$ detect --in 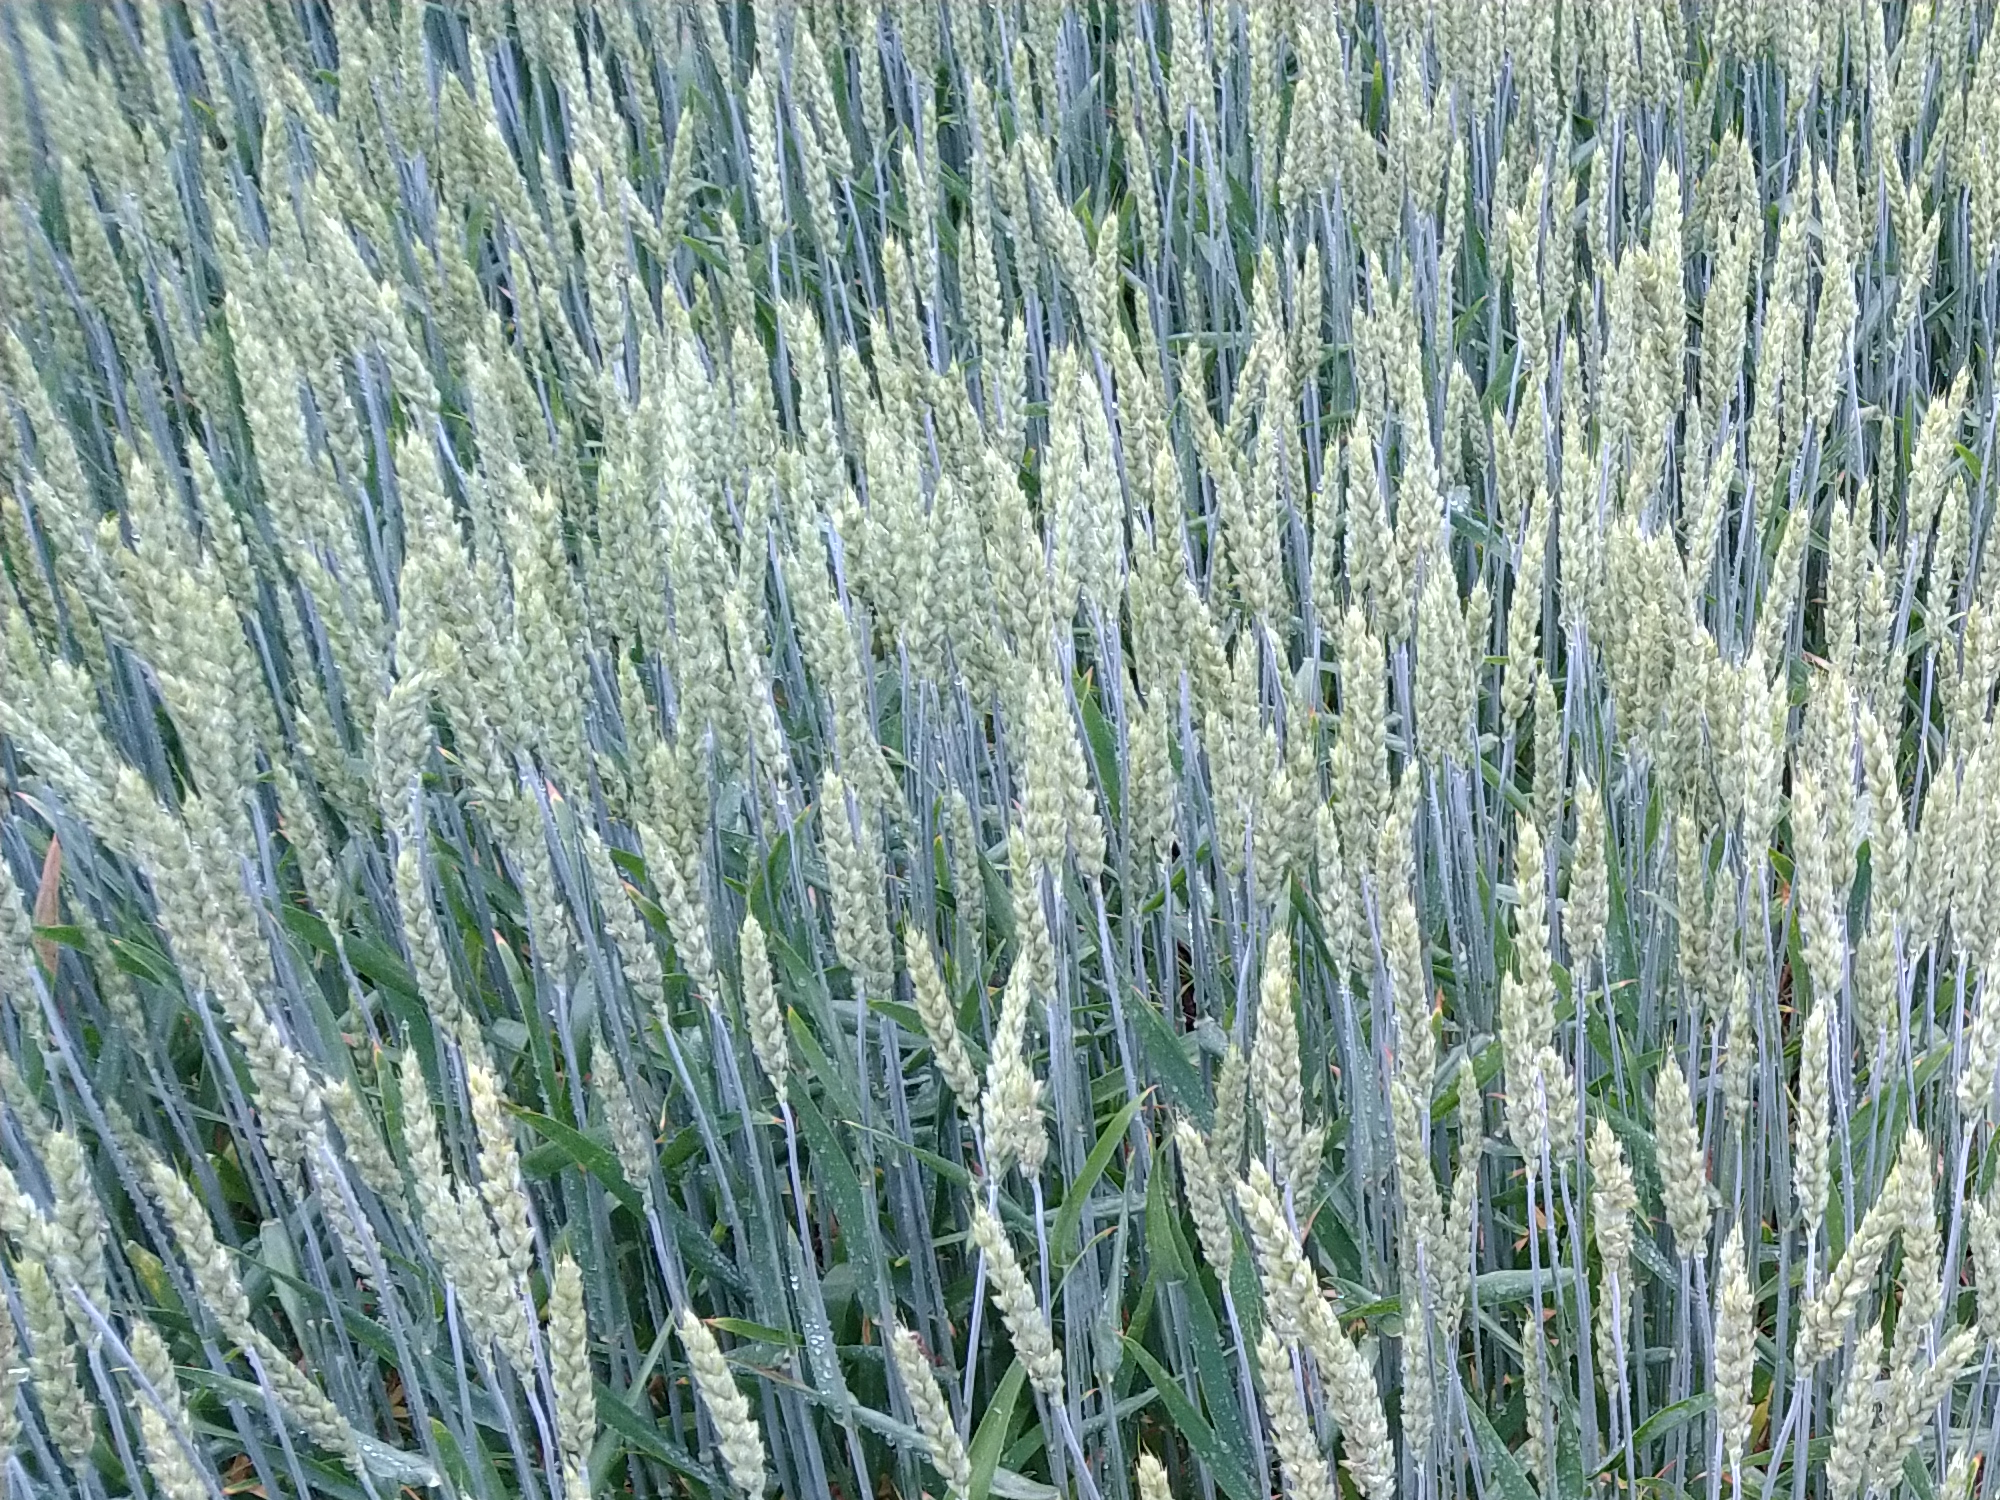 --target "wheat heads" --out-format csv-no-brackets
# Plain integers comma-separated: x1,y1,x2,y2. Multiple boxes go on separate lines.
726,603,793,777
1958,602,1992,721
734,475,772,627
1261,94,1282,189
1402,1307,1433,1456
1866,1330,1988,1494
1588,464,1610,631
336,16,357,123
973,1205,1069,1386
1302,100,1327,195
1978,7,2000,124
393,852,472,1046
1279,397,1305,521
1585,146,1608,262
1679,815,1712,987
1363,246,1401,397
152,676,256,862
898,0,926,66
394,447,431,560
651,742,702,900
369,0,396,39
1762,0,1786,69
1957,910,2000,1109
431,213,460,353
952,378,1000,488
1668,85,1694,157
637,408,655,501
1537,1053,1584,1167
1339,116,1367,225
1682,63,1722,164
1280,76,1308,204
136,1402,239,1500
63,574,108,669
1054,686,1103,875
1613,618,1637,741
1213,0,1234,57
1785,296,1806,460
696,522,733,612
274,341,326,543
600,162,632,278
1509,812,1556,1031
302,680,347,761
1198,65,1218,160
1737,140,1762,265
223,291,250,394
0,555,40,685
289,74,382,232
1862,146,1878,243
1118,726,1152,901
438,639,517,842
676,349,710,494
1876,418,1897,513
1558,417,1592,640
676,712,708,809
12,466,128,643
1936,642,1974,746
125,1318,196,1420
1198,712,1247,874
589,1044,652,1179
1789,775,1846,991
1651,670,1686,797
508,246,542,347
1096,216,1119,364
562,30,600,178
1135,130,1160,257
1759,513,1810,680
1876,915,1905,1077
1945,93,1965,190
1908,757,1957,950
1391,905,1440,1102
52,652,124,791
1653,165,1687,384
1561,0,1574,89
1765,680,1789,826
487,313,504,369
268,764,341,913
1735,0,1758,59
712,376,746,473
1109,332,1151,507
1708,662,1745,818
904,412,951,529
1400,22,1426,108
1348,48,1361,119
798,498,820,566
967,84,1009,211
249,1087,306,1186
922,0,939,62
1836,127,1858,256
1398,447,1428,594
1858,568,1894,707
56,21,107,142
404,0,426,105
1724,225,1753,380
198,551,228,606
98,63,121,145
219,222,278,357
1185,267,1198,335
1948,755,2000,927
139,431,169,508
1060,210,1088,285
1203,437,1270,609
0,1062,54,1158
1434,250,1460,356
1817,168,1860,325
850,822,893,998
1642,11,1658,116
1172,0,1201,102
556,1461,621,1500
1510,0,1530,87
1846,0,1868,89
1869,97,1893,146
1588,1115,1629,1254
1716,864,1737,1005
702,0,733,80
396,557,437,678
1442,140,1466,249
461,1013,491,1075
1235,632,1258,803
1825,499,1859,671
1488,158,1507,269
618,172,662,253
1343,490,1365,582
110,548,155,627
999,321,1030,468
1342,820,1379,976
1409,99,1427,208
1013,1061,1047,1165
1253,1328,1339,1500
1177,580,1243,723
696,274,728,383
1603,524,1633,681
781,305,798,360
1878,125,1906,250
916,85,939,215
101,8,151,111
398,1049,470,1270
326,241,368,329
278,198,311,264
1053,343,1076,433
1567,766,1603,964
188,11,235,132
673,542,717,688
1917,99,1951,196
484,121,560,279
1635,245,1673,399
1314,437,1341,629
116,773,196,950
234,1327,368,1474
1042,1,1060,53
742,911,788,1086
1714,218,1736,290
1289,732,1325,889
1542,228,1554,308
1713,0,1744,52
1988,114,2000,226
1934,0,1948,44
653,0,678,52
1409,582,1445,774
1135,1455,1194,1500
1808,272,1839,413
1073,372,1122,601
183,588,234,694
1635,603,1661,730
752,0,782,85
0,1299,27,1451
1356,640,1388,820
1265,628,1399,751
990,535,1047,669
1284,241,1301,347
1503,94,1533,200
1283,1131,1327,1222
1305,244,1320,352
1436,550,1480,722
108,1112,174,1231
806,39,849,160
1603,249,1631,424
1747,300,1788,477
629,280,662,344
1534,391,1548,485
618,650,661,794
1944,18,1962,96
1534,672,1564,848
1550,125,1572,186
1023,135,1070,246
538,7,570,84
773,451,805,546
67,83,90,165
792,309,847,510
887,1323,969,1492
661,109,694,271
1736,642,1775,848
861,16,884,142
863,723,910,822
1474,2,1502,118
364,30,418,157
462,1050,543,1255
410,86,439,165
1420,0,1432,57
1585,48,1604,112
949,0,980,77
264,250,298,334
982,362,1002,428
0,883,43,1012
1465,375,1490,462
983,956,1030,1168
247,408,309,572
749,344,785,452
1607,0,1618,78
1849,480,1873,575
478,0,507,33
349,996,383,1117
1170,1121,1228,1278
1255,738,1292,894
305,1131,379,1281
245,33,276,101
1076,267,1098,336
206,191,241,251
1682,394,1705,522
1424,89,1452,208
660,388,697,534
296,286,365,475
1423,568,1467,767
550,1260,591,1456
1464,577,1495,667
19,25,86,163
0,502,69,647
1377,101,1404,238
86,221,162,376
267,106,289,204
715,269,762,338
82,119,139,230
1305,31,1340,181
1649,1086,1687,1239
116,438,136,491
1645,9,1678,102
903,148,935,304
733,329,757,408
291,710,335,803
1700,183,1726,256
1153,452,1191,606
1009,43,1039,135
1632,324,1663,466
83,520,124,595
520,802,571,960
407,241,442,307
1123,0,1137,47
958,222,978,323
166,828,228,943
1341,0,1354,35
1260,248,1285,324
861,409,902,621
468,31,498,123
237,0,292,90
1512,366,1555,471
1628,515,1673,672
1577,0,1587,30
211,599,254,778
1664,0,1684,66
843,487,868,589
140,0,183,131
1499,485,1551,710
1134,41,1166,132
1354,412,1404,639
1787,1,1816,128
1794,677,1830,795
0,703,131,859
840,4,857,43
1554,178,1577,309
1682,663,1710,799
317,1078,412,1205
826,603,858,788
978,228,1002,367
983,452,1042,559
1505,203,1548,366
0,1175,63,1253
201,138,232,214
1950,363,1975,463
1862,11,1893,102
607,386,629,449
1310,1315,1398,1499
1521,163,1547,254
597,0,623,43
1431,0,1462,68
210,0,244,51
1788,212,1813,305
1970,1195,2000,1341
1893,1128,1941,1313
1362,133,1386,212
1743,857,1769,973
1592,829,1608,934
1532,0,1553,71
1906,397,1955,568
811,0,836,82
787,556,822,691
118,122,174,239
1797,1004,1831,1232
626,469,680,626
1123,525,1174,701
925,379,962,449
1007,827,1057,986
1889,652,1909,742
1376,808,1406,948
1925,496,1962,632
1578,279,1603,396
278,581,323,706
1349,305,1384,456
420,545,540,741
793,111,836,241
672,1311,773,1491
1908,9,1931,39
745,66,782,233
1626,133,1639,223
587,836,662,1001
1457,1046,1482,1151
1140,390,1175,458
1393,756,1422,864
124,459,197,672
1396,256,1423,349
16,1262,100,1457
325,498,390,643
1009,148,1037,289
1026,0,1043,33
1955,475,1972,581
445,83,484,196
209,938,328,1116
1564,335,1583,427
901,525,930,669
57,428,94,511
1597,1251,1626,1390
1815,0,1842,81
972,152,991,236
1655,525,1708,658
1859,705,1905,928
866,322,920,439
645,848,718,997
408,437,453,540
639,334,663,408
1882,1278,1931,1417
161,1166,247,1324
292,0,315,74
1747,427,1777,521
1919,1455,1972,1500
1622,47,1639,132
1611,0,1633,107
1880,545,1896,602
1232,1176,1338,1351
944,787,983,937
1979,484,2000,592
1404,339,1435,492
1440,359,1470,492
1246,13,1270,139
1991,1129,2000,1243
582,542,611,644
380,679,432,844
243,515,286,611
1180,379,1217,462
1381,0,1422,96
554,570,588,679
62,160,114,317
1148,688,1179,867
531,495,565,589
319,219,438,404
1500,974,1547,1156
1182,339,1205,410
252,655,282,760
1018,668,1065,855
594,459,633,629
136,113,188,248
1890,28,1928,122
1262,937,1306,1174
794,14,809,106
1220,326,1273,450
1662,1053,1720,1240
1522,1318,1552,1474
1793,1162,1894,1369
1043,428,1083,615
191,443,253,595
265,0,303,76
540,285,607,420
163,492,201,570
554,417,590,534
1328,742,1358,829
349,0,371,36
499,352,548,486
1487,408,1524,547
467,351,523,516
348,60,406,206
1254,427,1283,580
236,337,288,454
1388,1088,1444,1295
900,936,977,1108
880,239,934,406
1340,608,1364,743
660,285,702,363
1804,138,1809,254
965,0,988,62
158,278,213,392
1687,167,1712,258
569,152,624,353
511,0,541,81
303,557,387,745
821,768,858,970
1262,364,1290,440
1955,42,1994,159
1250,1016,1267,1126
626,15,664,144
528,593,584,789
1898,209,1944,325
993,0,1015,42
1825,1319,1877,1496
261,196,285,250
0,196,43,351
1135,291,1164,401
457,1177,533,1359
721,210,756,314
0,44,30,187
1039,47,1070,117
1712,1224,1754,1440
1250,280,1273,339
773,0,795,46
471,491,511,645
1691,440,1739,603
1458,0,1476,94
27,227,90,371
72,893,144,1029
0,400,24,472
1317,806,1347,962
1823,682,1859,898
590,60,629,176
1324,24,1355,165
1444,1166,1479,1327
1246,1156,1281,1217
1855,932,1871,1071
1533,75,1554,156
1771,222,1792,301
927,485,1000,702
1967,142,1996,266
1718,127,1739,227
706,612,751,761
0,89,14,176
2,325,103,516
1701,289,1726,439
43,1136,108,1312
1220,1053,1243,1167
1210,468,1252,618
371,206,402,271
1723,976,1756,1123
1904,184,1921,277
1114,39,1130,142
1168,34,1190,130
836,342,877,467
